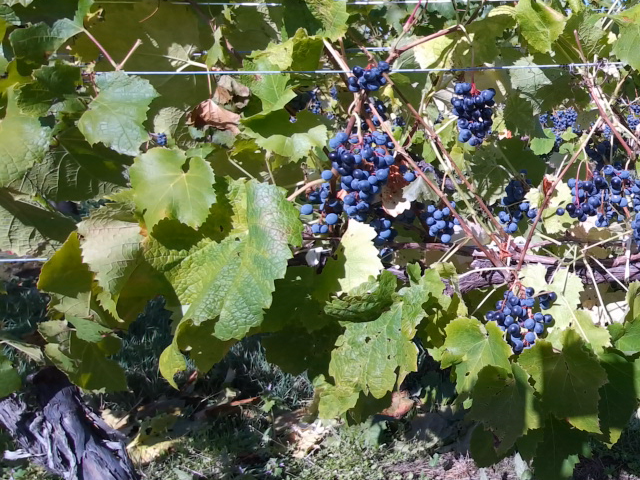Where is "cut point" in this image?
Masks as SVG:
<instances>
[{
    "label": "cut point",
    "instance_id": "cut-point-1",
    "mask_svg": "<svg viewBox=\"0 0 640 480\" xmlns=\"http://www.w3.org/2000/svg\"><path fill=\"white\" fill-rule=\"evenodd\" d=\"M462 30V32L464 33V35L467 37V39L469 40V46L471 49V63H474V47L472 44V37L469 35V33L467 32V30H465V28H460Z\"/></svg>",
    "mask_w": 640,
    "mask_h": 480
}]
</instances>
